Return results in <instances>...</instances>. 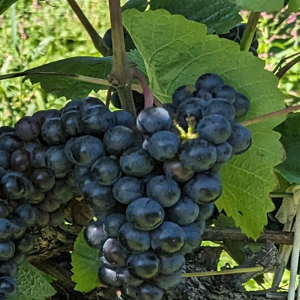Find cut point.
<instances>
[{
    "label": "cut point",
    "instance_id": "cut-point-1",
    "mask_svg": "<svg viewBox=\"0 0 300 300\" xmlns=\"http://www.w3.org/2000/svg\"><path fill=\"white\" fill-rule=\"evenodd\" d=\"M130 75L134 78H137L138 83L142 88V93L144 94V108L153 106L154 95L152 93V90L149 88L145 76L136 69H131Z\"/></svg>",
    "mask_w": 300,
    "mask_h": 300
}]
</instances>
